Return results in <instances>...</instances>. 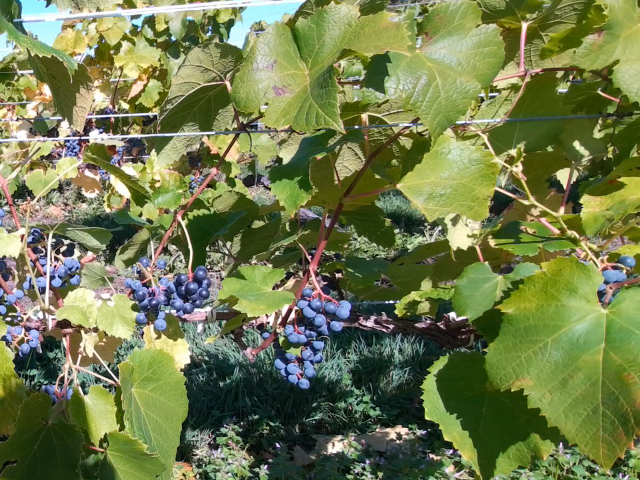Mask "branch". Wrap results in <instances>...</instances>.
Returning a JSON list of instances; mask_svg holds the SVG:
<instances>
[{
    "instance_id": "4",
    "label": "branch",
    "mask_w": 640,
    "mask_h": 480,
    "mask_svg": "<svg viewBox=\"0 0 640 480\" xmlns=\"http://www.w3.org/2000/svg\"><path fill=\"white\" fill-rule=\"evenodd\" d=\"M0 183L2 184L3 188H4V193H5V198L9 207V211L13 217V220L15 222V226L17 229L21 228V223H20V219L18 218V215L16 213V210L14 208V204L13 201L11 199V195H10V190H9V186L7 184V181L5 180V178L3 177L2 174H0Z\"/></svg>"
},
{
    "instance_id": "6",
    "label": "branch",
    "mask_w": 640,
    "mask_h": 480,
    "mask_svg": "<svg viewBox=\"0 0 640 480\" xmlns=\"http://www.w3.org/2000/svg\"><path fill=\"white\" fill-rule=\"evenodd\" d=\"M51 291L55 294L57 303H58V307L62 308L63 307V300L60 294V291L56 288V287H52Z\"/></svg>"
},
{
    "instance_id": "1",
    "label": "branch",
    "mask_w": 640,
    "mask_h": 480,
    "mask_svg": "<svg viewBox=\"0 0 640 480\" xmlns=\"http://www.w3.org/2000/svg\"><path fill=\"white\" fill-rule=\"evenodd\" d=\"M410 131L409 127H401L398 130H396L394 133H392L391 135H389L384 142L380 145V147L375 150L372 154H370L363 162L360 171L358 172V174L356 175V177L349 183V185L347 186V188L345 189V191L341 194L339 200H338V206L336 207L334 214L332 216V219L327 227L326 233L323 237V239L321 240L320 244L317 246V249L315 251V254L312 257L311 262L308 264V271L306 272V274L304 275V277L301 279V282L299 283V285L296 288L295 291V295L297 297H300L304 291V289L307 286V283L309 282V280L312 278V276L314 275V273L317 271V265L319 263V260L322 256V253L325 249V247L328 245V243L330 242L333 232L335 230V227L341 217V214L344 210L345 207V203L347 201V198L352 194V192L354 191L355 187L358 185V183L364 178V176L366 175L368 168L370 167L371 163L377 159L380 155H382L388 148V146L396 139H398L399 137H401L402 135L408 133Z\"/></svg>"
},
{
    "instance_id": "7",
    "label": "branch",
    "mask_w": 640,
    "mask_h": 480,
    "mask_svg": "<svg viewBox=\"0 0 640 480\" xmlns=\"http://www.w3.org/2000/svg\"><path fill=\"white\" fill-rule=\"evenodd\" d=\"M0 285L2 286V288H3L4 290H6V291H7V295H8V296H12V295H13V292H12L11 287H10V286H8V285L4 282V280H3V277H2V276H0Z\"/></svg>"
},
{
    "instance_id": "5",
    "label": "branch",
    "mask_w": 640,
    "mask_h": 480,
    "mask_svg": "<svg viewBox=\"0 0 640 480\" xmlns=\"http://www.w3.org/2000/svg\"><path fill=\"white\" fill-rule=\"evenodd\" d=\"M25 250H26V254H27V256L30 258V260H31L32 264H33L34 266H36V267H37V272H38L40 275H44V274H45V271L42 269V265H41V263H40L39 261H37V260H36V257L33 255V253H32V251H31L30 246H29V245H26V246H25Z\"/></svg>"
},
{
    "instance_id": "3",
    "label": "branch",
    "mask_w": 640,
    "mask_h": 480,
    "mask_svg": "<svg viewBox=\"0 0 640 480\" xmlns=\"http://www.w3.org/2000/svg\"><path fill=\"white\" fill-rule=\"evenodd\" d=\"M297 306V303L295 301H292L290 303V306L287 308L286 312L284 313L279 325L273 330V332H271L264 341L258 343L257 345H255L250 351L249 354L251 356H255L259 351L265 349L267 346H269L271 344V342L277 338L279 336V334L283 331V328L287 325L290 317L292 316V314L295 311V307Z\"/></svg>"
},
{
    "instance_id": "2",
    "label": "branch",
    "mask_w": 640,
    "mask_h": 480,
    "mask_svg": "<svg viewBox=\"0 0 640 480\" xmlns=\"http://www.w3.org/2000/svg\"><path fill=\"white\" fill-rule=\"evenodd\" d=\"M239 138H240L239 134L238 135H234L231 138V140L229 141L228 145L226 146V148L222 152V154L220 156V159L214 163L211 171L207 174L205 179L198 186V188L194 192V194L191 197L188 198V200L183 204V206L180 208V210L175 214L173 219L170 221L169 226L167 227L165 233L159 239V242L157 243V245H156V247H155V249H154V251L152 253V259L154 261H157L159 259L161 251L163 250L168 238H170L172 236V234H173L178 222L185 215V213L188 211V209L195 203V200L197 199L198 194L205 188V186L209 183V181L215 176L218 168L225 162L226 156L228 155V153L232 149L233 145L235 144V142Z\"/></svg>"
}]
</instances>
